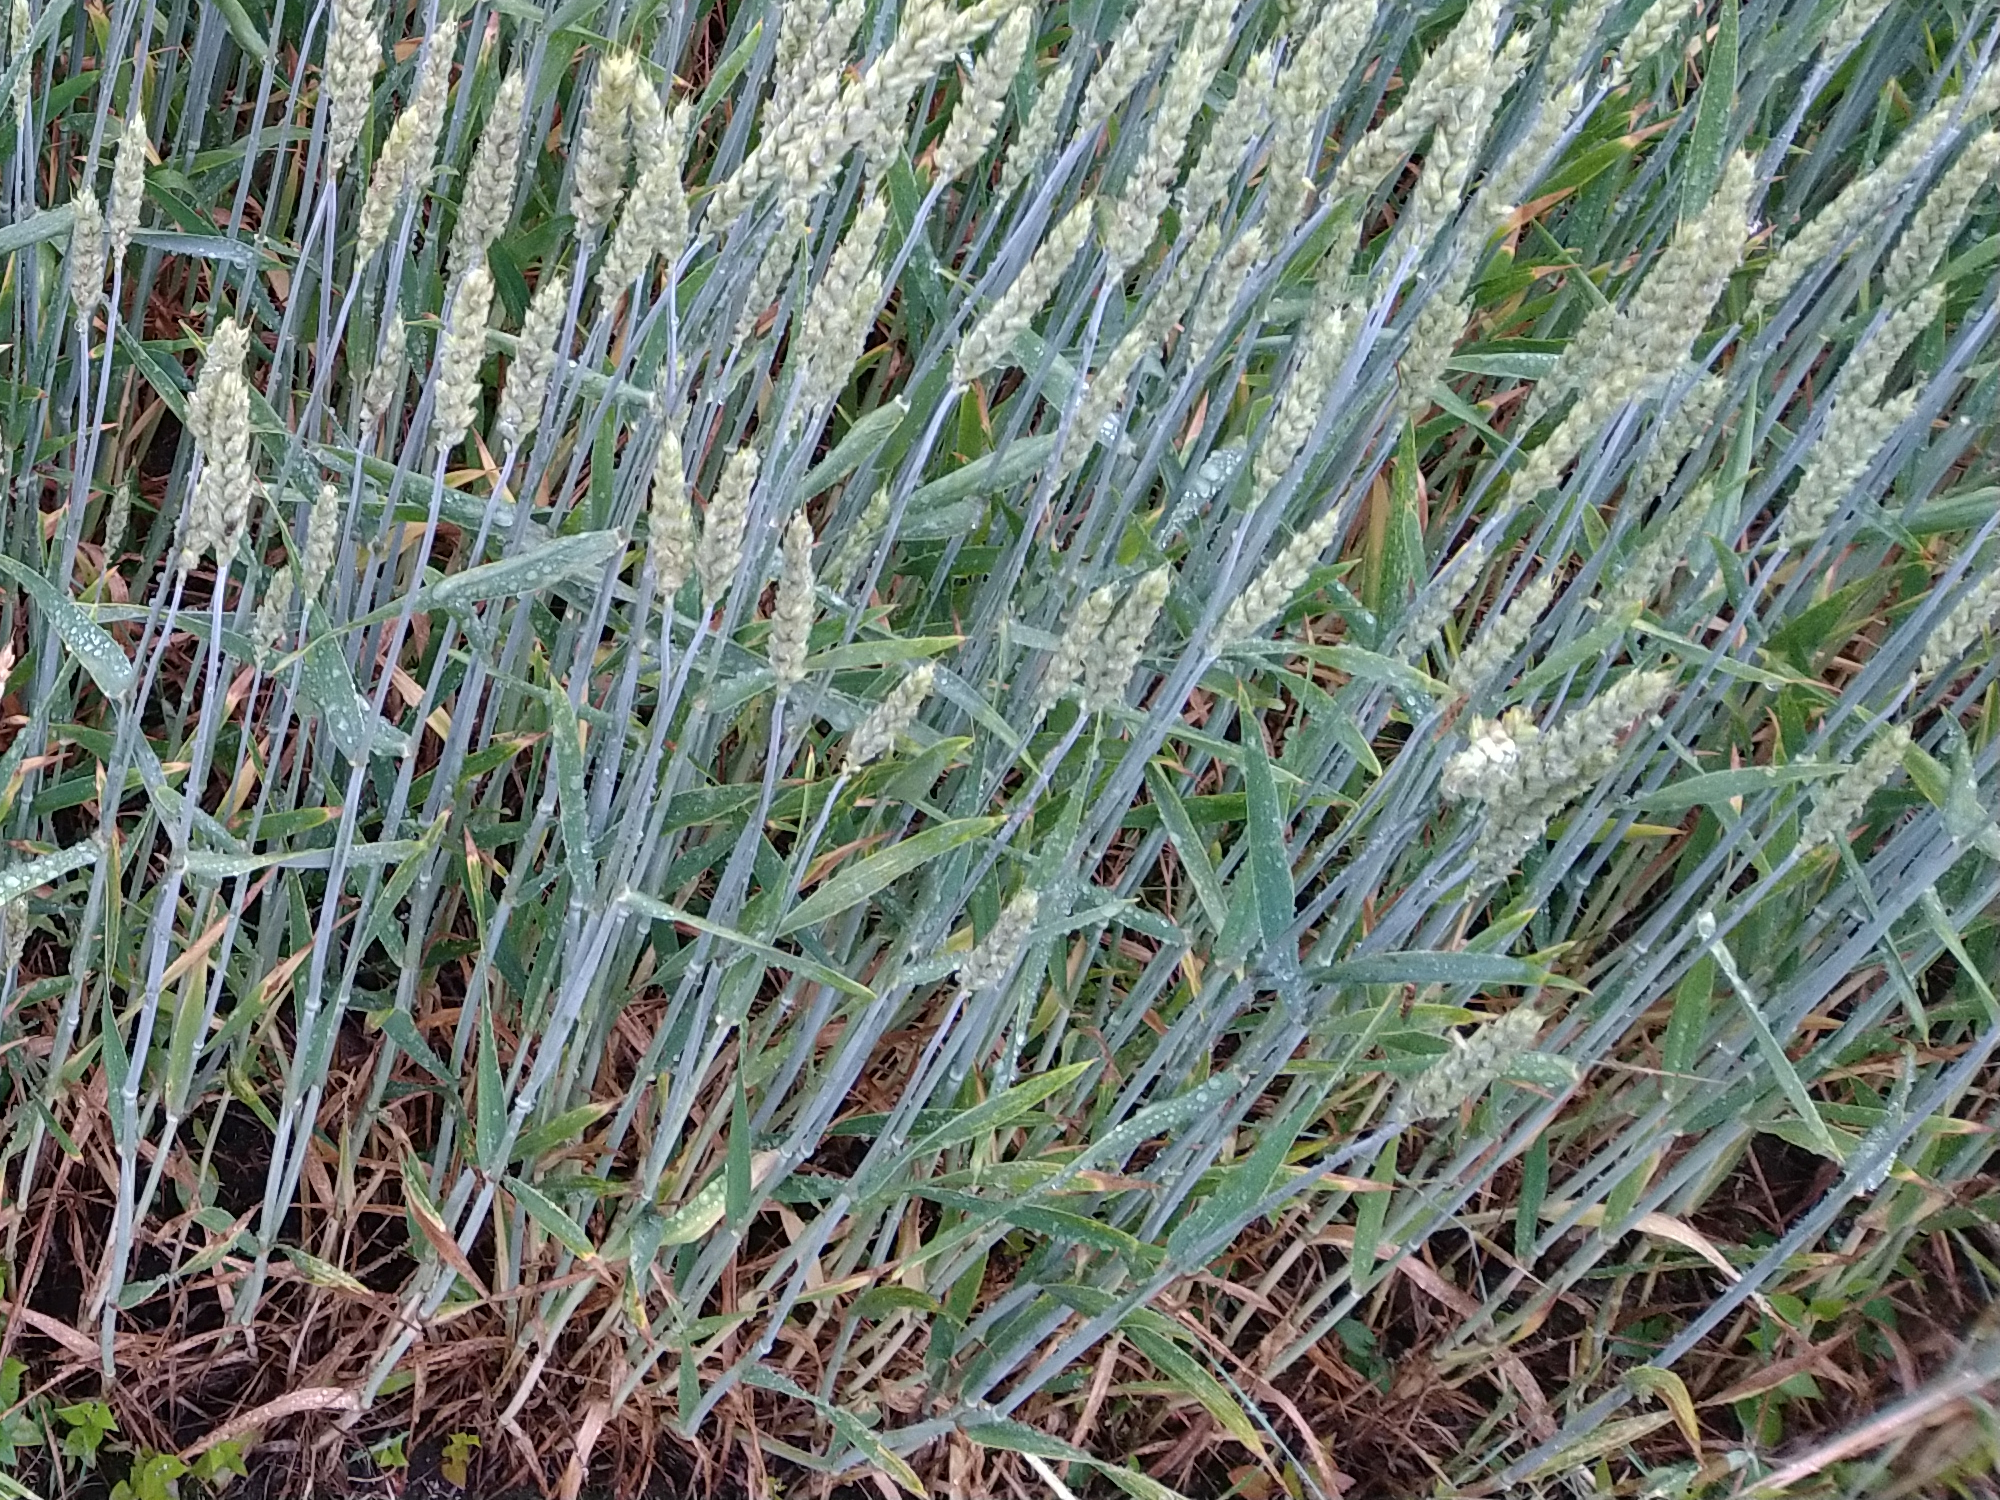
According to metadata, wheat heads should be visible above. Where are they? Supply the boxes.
[1615,0,1751,84]
[1053,334,1146,466]
[1470,101,1579,229]
[1299,0,1433,91]
[181,459,222,560]
[577,46,636,229]
[1426,0,1513,83]
[773,515,819,678]
[218,382,250,550]
[1389,1007,1539,1119]
[12,0,29,111]
[1091,0,1193,126]
[1136,0,1233,78]
[966,884,1035,985]
[839,493,892,582]
[1437,714,1529,784]
[1249,313,1339,490]
[1629,155,1758,328]
[1517,677,1669,796]
[1750,116,1941,306]
[1465,765,1589,883]
[931,0,1040,58]
[361,105,417,251]
[66,188,105,313]
[1442,588,1548,700]
[324,0,373,80]
[116,110,149,245]
[1879,133,2000,283]
[791,5,864,96]
[193,319,250,426]
[807,200,892,350]
[813,0,943,195]
[1533,301,1617,412]
[1149,229,1222,344]
[1215,513,1340,637]
[607,102,694,292]
[445,76,532,263]
[997,74,1075,197]
[692,448,761,591]
[1330,51,1474,198]
[321,39,378,161]
[1912,566,1997,671]
[1651,219,1745,379]
[1264,64,1315,229]
[1186,230,1262,359]
[1393,298,1473,432]
[1812,0,1938,86]
[944,10,1034,170]
[436,270,493,448]
[0,637,13,728]
[1835,285,1948,418]
[1406,236,1485,348]
[1091,565,1171,705]
[1797,718,1909,852]
[1181,51,1283,213]
[368,316,402,420]
[1504,373,1641,498]
[1406,546,1482,656]
[1542,0,1676,91]
[1781,395,1916,541]
[781,0,854,71]
[648,429,692,596]
[247,569,289,660]
[785,278,887,428]
[1396,86,1489,236]
[847,663,932,758]
[957,204,1091,362]
[881,0,943,177]
[1476,36,1529,142]
[1109,0,1253,250]
[415,15,461,177]
[1636,387,1723,515]
[732,204,800,348]
[309,493,339,596]
[630,82,689,245]
[704,76,836,230]
[1620,491,1707,612]
[504,279,570,440]
[1035,582,1105,711]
